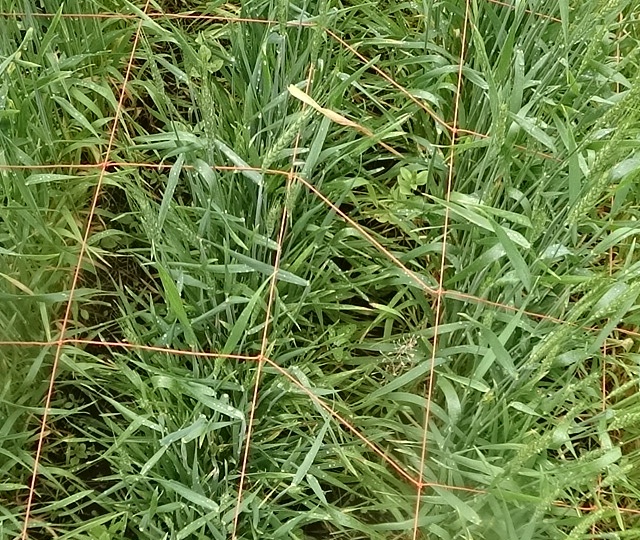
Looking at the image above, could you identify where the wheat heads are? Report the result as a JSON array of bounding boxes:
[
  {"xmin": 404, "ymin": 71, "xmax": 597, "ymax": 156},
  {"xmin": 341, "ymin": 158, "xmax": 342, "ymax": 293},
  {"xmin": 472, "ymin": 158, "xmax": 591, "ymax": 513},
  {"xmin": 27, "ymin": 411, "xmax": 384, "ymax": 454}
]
[
  {"xmin": 573, "ymin": 449, "xmax": 603, "ymax": 466},
  {"xmin": 146, "ymin": 54, "xmax": 165, "ymax": 92},
  {"xmin": 589, "ymin": 283, "xmax": 635, "ymax": 321},
  {"xmin": 518, "ymin": 435, "xmax": 554, "ymax": 461},
  {"xmin": 308, "ymin": 5, "xmax": 326, "ymax": 57},
  {"xmin": 579, "ymin": 30, "xmax": 603, "ymax": 76},
  {"xmin": 174, "ymin": 221, "xmax": 202, "ymax": 247},
  {"xmin": 541, "ymin": 342, "xmax": 560, "ymax": 376},
  {"xmin": 530, "ymin": 179, "xmax": 544, "ymax": 214},
  {"xmin": 591, "ymin": 89, "xmax": 635, "ymax": 129},
  {"xmin": 198, "ymin": 67, "xmax": 216, "ymax": 145},
  {"xmin": 570, "ymin": 372, "xmax": 597, "ymax": 392},
  {"xmin": 266, "ymin": 202, "xmax": 278, "ymax": 236},
  {"xmin": 570, "ymin": 510, "xmax": 605, "ymax": 536},
  {"xmin": 495, "ymin": 105, "xmax": 513, "ymax": 148},
  {"xmin": 610, "ymin": 412, "xmax": 636, "ymax": 432},
  {"xmin": 588, "ymin": 131, "xmax": 620, "ymax": 180},
  {"xmin": 275, "ymin": 1, "xmax": 287, "ymax": 36},
  {"xmin": 595, "ymin": 458, "xmax": 632, "ymax": 491},
  {"xmin": 531, "ymin": 489, "xmax": 555, "ymax": 519},
  {"xmin": 123, "ymin": 328, "xmax": 139, "ymax": 355},
  {"xmin": 567, "ymin": 176, "xmax": 604, "ymax": 226},
  {"xmin": 261, "ymin": 110, "xmax": 311, "ymax": 168},
  {"xmin": 594, "ymin": 0, "xmax": 617, "ymax": 23},
  {"xmin": 137, "ymin": 198, "xmax": 158, "ymax": 242}
]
